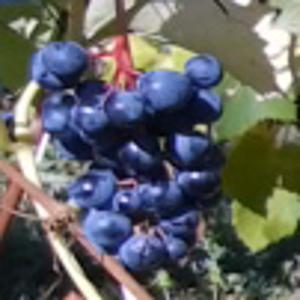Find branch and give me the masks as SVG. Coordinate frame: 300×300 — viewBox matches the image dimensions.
Instances as JSON below:
<instances>
[{
  "label": "branch",
  "mask_w": 300,
  "mask_h": 300,
  "mask_svg": "<svg viewBox=\"0 0 300 300\" xmlns=\"http://www.w3.org/2000/svg\"><path fill=\"white\" fill-rule=\"evenodd\" d=\"M39 94L35 82H29L16 102L13 127V147L17 167L5 158H0V170L8 176L0 206V243L5 241V233L12 219L13 211L26 189L34 196L33 204L47 238L56 252L59 262L72 280L84 300H102V295L79 263L71 246L65 240L59 221L68 225V232L76 242L101 262L103 270L119 284L126 287L138 300H154V295L120 265V260L100 253L87 242L80 217L71 206L49 190L43 189L42 181L32 157L28 138L29 122L27 113L32 99Z\"/></svg>",
  "instance_id": "branch-1"
}]
</instances>
